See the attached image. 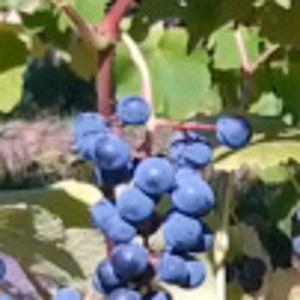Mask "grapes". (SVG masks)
Here are the masks:
<instances>
[{"label": "grapes", "instance_id": "84f90ec7", "mask_svg": "<svg viewBox=\"0 0 300 300\" xmlns=\"http://www.w3.org/2000/svg\"><path fill=\"white\" fill-rule=\"evenodd\" d=\"M53 300H82V296L77 289L65 286L55 290Z\"/></svg>", "mask_w": 300, "mask_h": 300}, {"label": "grapes", "instance_id": "b958b902", "mask_svg": "<svg viewBox=\"0 0 300 300\" xmlns=\"http://www.w3.org/2000/svg\"><path fill=\"white\" fill-rule=\"evenodd\" d=\"M213 132L218 145L241 149L250 144L253 139V123L245 114L223 115L215 120Z\"/></svg>", "mask_w": 300, "mask_h": 300}, {"label": "grapes", "instance_id": "01657485", "mask_svg": "<svg viewBox=\"0 0 300 300\" xmlns=\"http://www.w3.org/2000/svg\"><path fill=\"white\" fill-rule=\"evenodd\" d=\"M71 134L80 158L93 163L92 176L105 190L132 181L118 199H97L91 214L98 232L113 244L92 274V283L104 300H173L167 290L142 292L130 287L146 281L151 254L137 240L142 225L161 208L170 207L163 219V248L154 279L161 286L191 292L209 279L206 263L196 258L212 250L215 237L199 217L213 214L218 193L200 169L214 158V146L196 130H178L167 144V156L134 159L131 144L119 138L113 125L94 111L76 114Z\"/></svg>", "mask_w": 300, "mask_h": 300}, {"label": "grapes", "instance_id": "0513c4c2", "mask_svg": "<svg viewBox=\"0 0 300 300\" xmlns=\"http://www.w3.org/2000/svg\"><path fill=\"white\" fill-rule=\"evenodd\" d=\"M115 112L119 121L127 126L145 125L151 119L148 102L136 94H128L117 99Z\"/></svg>", "mask_w": 300, "mask_h": 300}]
</instances>
